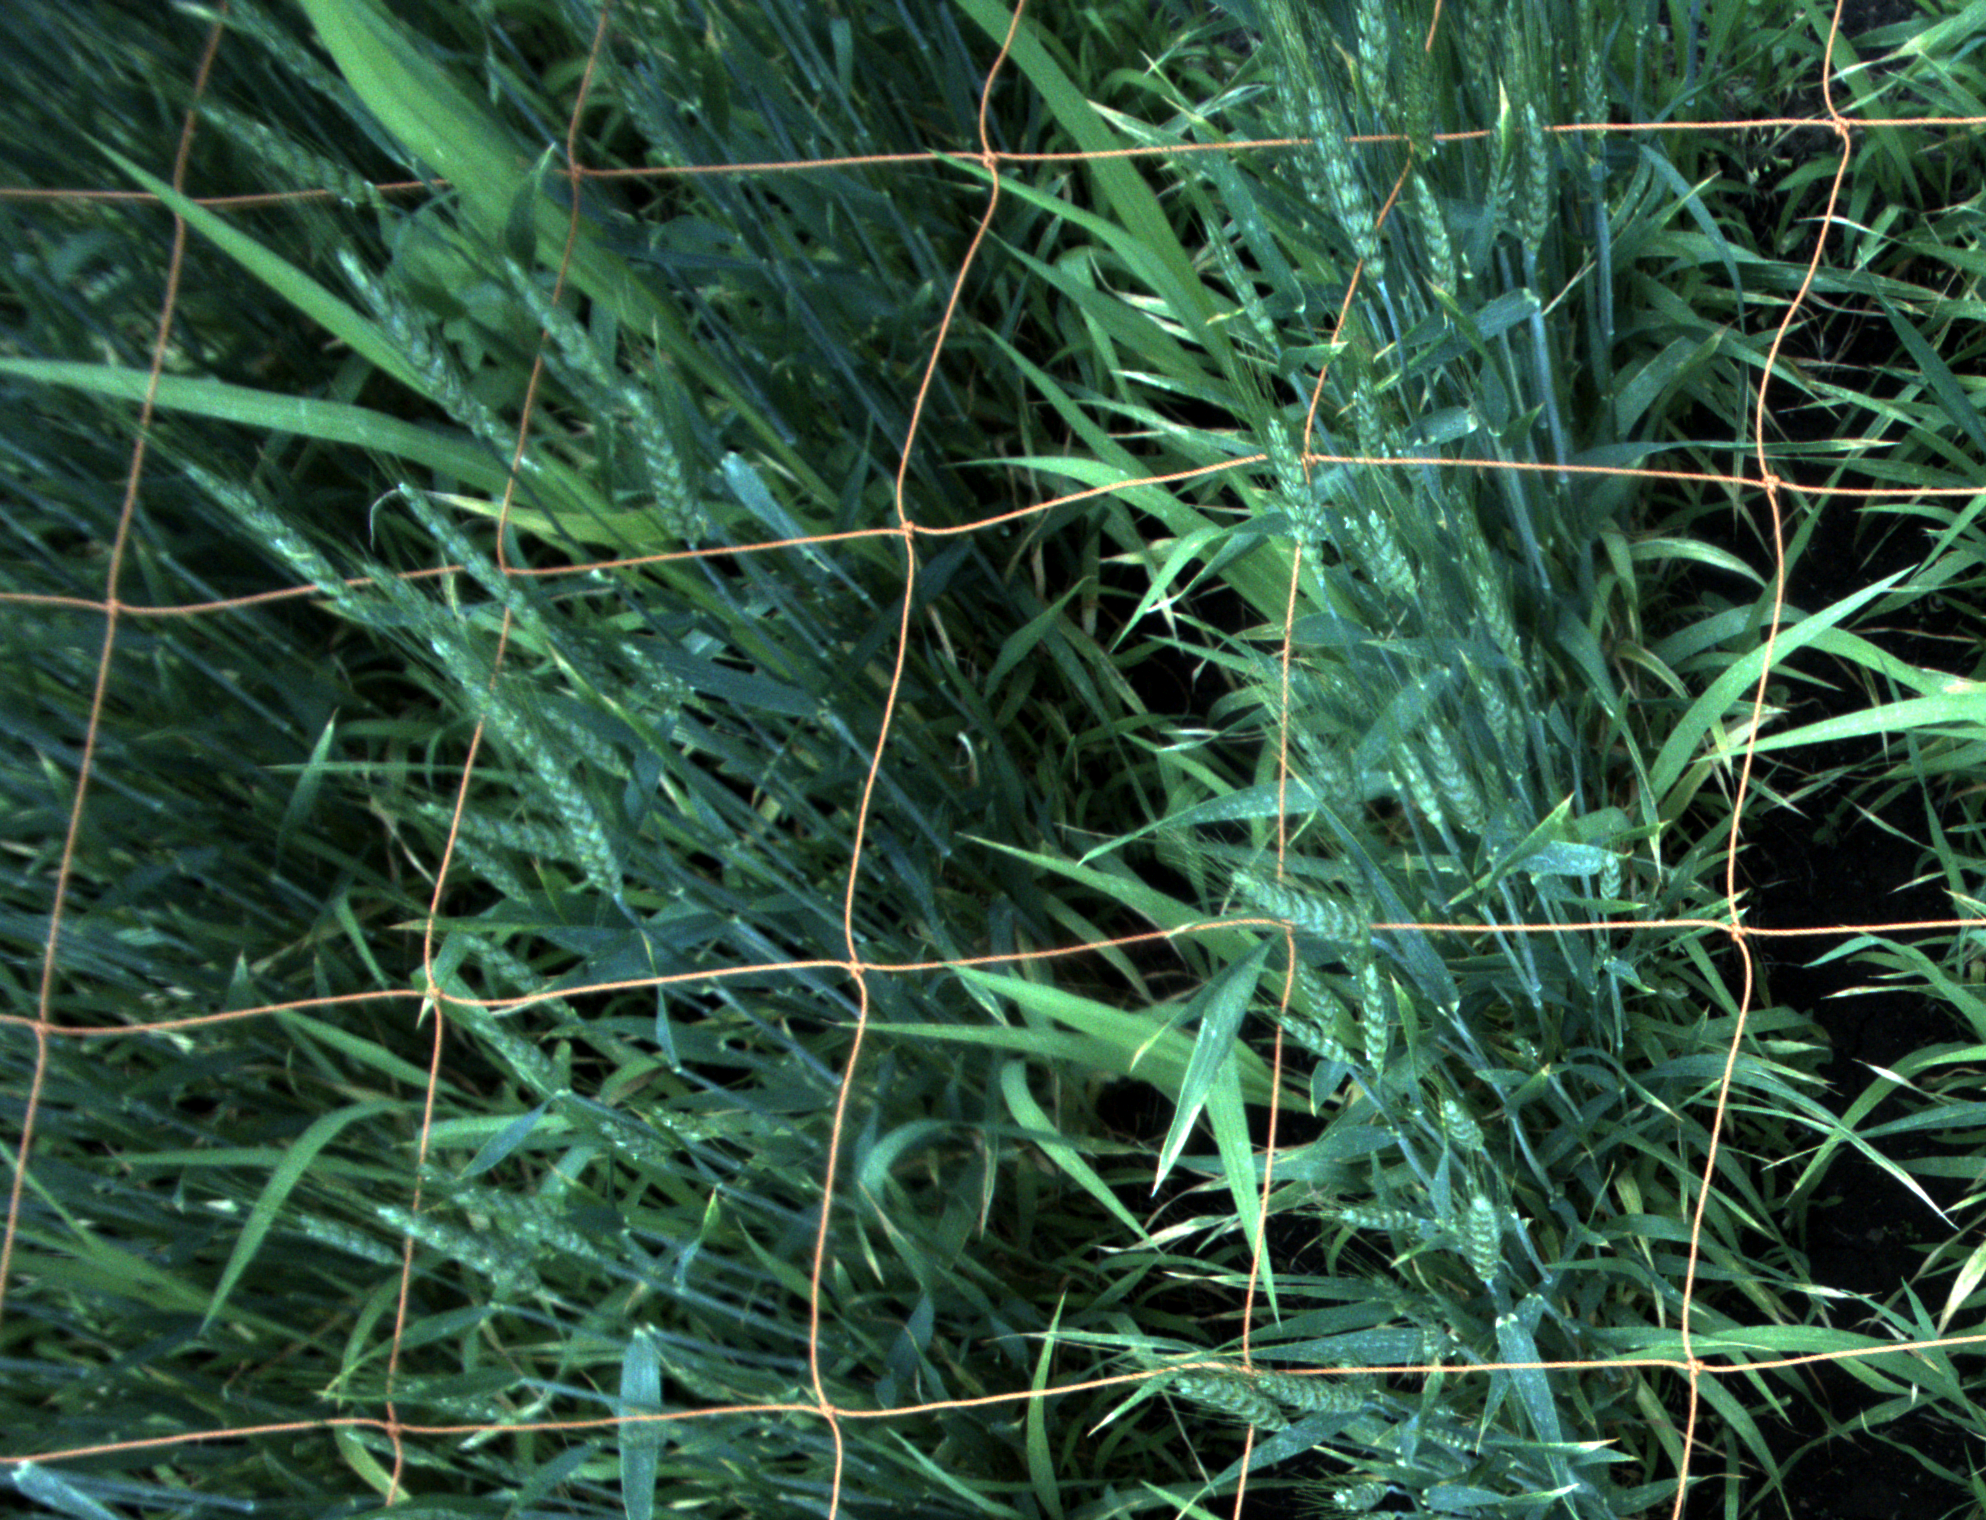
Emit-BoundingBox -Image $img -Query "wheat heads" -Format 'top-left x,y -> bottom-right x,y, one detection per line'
433,637 -> 534,756
1476,672 -> 1512,755
464,1450 -> 537,1481
1400,20 -> 1441,157
228,1 -> 351,104
1341,1204 -> 1416,1234
1467,1195 -> 1500,1280
1532,637 -> 1547,687
454,836 -> 529,904
648,1101 -> 715,1137
372,1505 -> 475,1520
1346,1506 -> 1396,1520
185,462 -> 384,627
1427,717 -> 1488,833
1266,414 -> 1325,582
1296,953 -> 1341,1035
619,81 -> 690,163
1372,1270 -> 1428,1314
511,1219 -> 600,1261
1512,1033 -> 1538,1059
1172,1372 -> 1293,1436
1414,169 -> 1458,296
475,396 -> 539,474
346,1428 -> 443,1467
1599,854 -> 1621,906
445,1187 -> 573,1218
1353,370 -> 1383,458
616,1421 -> 685,1446
1431,1215 -> 1469,1251
376,1204 -> 543,1289
334,245 -> 487,438
471,1017 -> 556,1072
1443,1095 -> 1486,1151
461,931 -> 575,1017
1337,849 -> 1371,907
1483,110 -> 1522,219
595,1117 -> 673,1164
1459,8 -> 1495,87
1356,7 -> 1391,111
1273,57 -> 1329,214
1227,866 -> 1372,941
300,1209 -> 404,1265
506,257 -> 616,386
1331,1479 -> 1389,1510
1419,1320 -> 1443,1358
1447,482 -> 1495,580
1296,726 -> 1365,823
1325,672 -> 1374,718
514,774 -> 560,815
1419,556 -> 1451,634
363,560 -> 464,642
1584,50 -> 1608,138
1486,760 -> 1526,843
1386,416 -> 1426,491
400,483 -> 543,628
531,750 -> 627,898
539,347 -> 609,419
1252,1371 -> 1366,1410
1423,1426 -> 1485,1453
405,1381 -> 506,1424
1476,568 -> 1523,660
1576,3 -> 1595,50
1313,488 -> 1335,535
673,1362 -> 734,1400
411,1159 -> 494,1231
1343,512 -> 1393,600
1500,6 -> 1525,110
1520,101 -> 1549,245
1602,956 -> 1635,983
1261,6 -> 1313,88
415,797 -> 575,859
544,707 -> 632,776
1509,704 -> 1527,759
625,381 -> 701,544
1361,964 -> 1388,1073
620,640 -> 702,711
1203,214 -> 1279,343
199,104 -> 390,213
1369,504 -> 1417,597
607,416 -> 642,488
544,619 -> 619,695
1262,1002 -> 1356,1066
1306,88 -> 1382,280
1590,940 -> 1608,975
1396,735 -> 1443,825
